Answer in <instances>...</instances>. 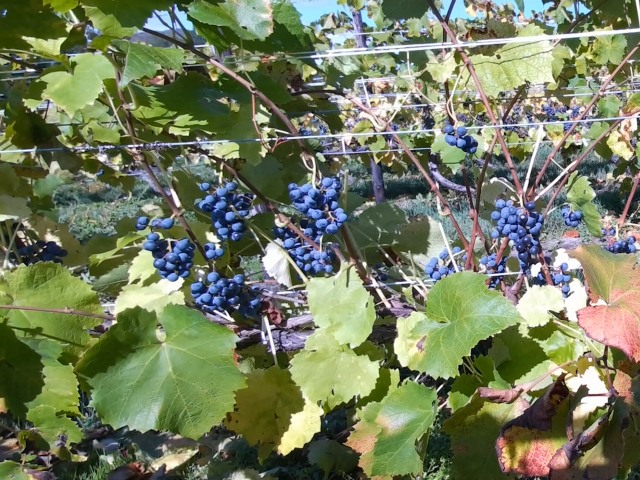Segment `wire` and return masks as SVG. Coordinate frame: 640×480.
I'll use <instances>...</instances> for the list:
<instances>
[{
  "mask_svg": "<svg viewBox=\"0 0 640 480\" xmlns=\"http://www.w3.org/2000/svg\"><path fill=\"white\" fill-rule=\"evenodd\" d=\"M417 284H418L417 280H396V281L380 283V284H365L364 288L365 289H382V288H389V287L398 286V285H417Z\"/></svg>",
  "mask_w": 640,
  "mask_h": 480,
  "instance_id": "wire-6",
  "label": "wire"
},
{
  "mask_svg": "<svg viewBox=\"0 0 640 480\" xmlns=\"http://www.w3.org/2000/svg\"><path fill=\"white\" fill-rule=\"evenodd\" d=\"M616 120H640V115H613V116H604L600 118H576L571 120L471 125V126H467L466 130L473 131V130L510 129V128L541 127V126H556V125H573L577 123H602L606 121H616Z\"/></svg>",
  "mask_w": 640,
  "mask_h": 480,
  "instance_id": "wire-3",
  "label": "wire"
},
{
  "mask_svg": "<svg viewBox=\"0 0 640 480\" xmlns=\"http://www.w3.org/2000/svg\"><path fill=\"white\" fill-rule=\"evenodd\" d=\"M640 35V27H624L612 30H601L592 32H571L560 34L528 35L524 37H502L491 39H468L455 41H429V42H407L399 45H378V46H358L342 49L326 50H275L245 53L240 55H215V60H224L226 65H249L255 63H265L273 61H298L308 59H334L337 57L351 55H382V54H402V53H423L433 50L461 49L466 47H480L481 44H493L504 42H526L530 40L543 39H568L574 37H594L603 35Z\"/></svg>",
  "mask_w": 640,
  "mask_h": 480,
  "instance_id": "wire-1",
  "label": "wire"
},
{
  "mask_svg": "<svg viewBox=\"0 0 640 480\" xmlns=\"http://www.w3.org/2000/svg\"><path fill=\"white\" fill-rule=\"evenodd\" d=\"M38 72H39L38 68H32V69H27V70H4V69H0V74H2V75H27V76L0 77V82L35 80V79L39 78V75L38 74H34V73H38Z\"/></svg>",
  "mask_w": 640,
  "mask_h": 480,
  "instance_id": "wire-5",
  "label": "wire"
},
{
  "mask_svg": "<svg viewBox=\"0 0 640 480\" xmlns=\"http://www.w3.org/2000/svg\"><path fill=\"white\" fill-rule=\"evenodd\" d=\"M276 136L259 138H238L223 140H184L182 142L168 143H140L128 145H79L73 147H53V148H23V149H0V154H25V153H55V152H76L82 150H130L142 148H170L184 147L186 145H225L240 143H261L274 142Z\"/></svg>",
  "mask_w": 640,
  "mask_h": 480,
  "instance_id": "wire-2",
  "label": "wire"
},
{
  "mask_svg": "<svg viewBox=\"0 0 640 480\" xmlns=\"http://www.w3.org/2000/svg\"><path fill=\"white\" fill-rule=\"evenodd\" d=\"M202 61H203L202 57L184 58L183 62L187 64L183 65V69L187 70L189 68H207L212 66L211 62L194 63V62H202Z\"/></svg>",
  "mask_w": 640,
  "mask_h": 480,
  "instance_id": "wire-7",
  "label": "wire"
},
{
  "mask_svg": "<svg viewBox=\"0 0 640 480\" xmlns=\"http://www.w3.org/2000/svg\"><path fill=\"white\" fill-rule=\"evenodd\" d=\"M440 127L437 128H412V129H400V130H383V131H371L366 133H308L301 135H282L281 141L285 140H303L310 138H368L374 136L385 135H402V134H414V133H439Z\"/></svg>",
  "mask_w": 640,
  "mask_h": 480,
  "instance_id": "wire-4",
  "label": "wire"
}]
</instances>
